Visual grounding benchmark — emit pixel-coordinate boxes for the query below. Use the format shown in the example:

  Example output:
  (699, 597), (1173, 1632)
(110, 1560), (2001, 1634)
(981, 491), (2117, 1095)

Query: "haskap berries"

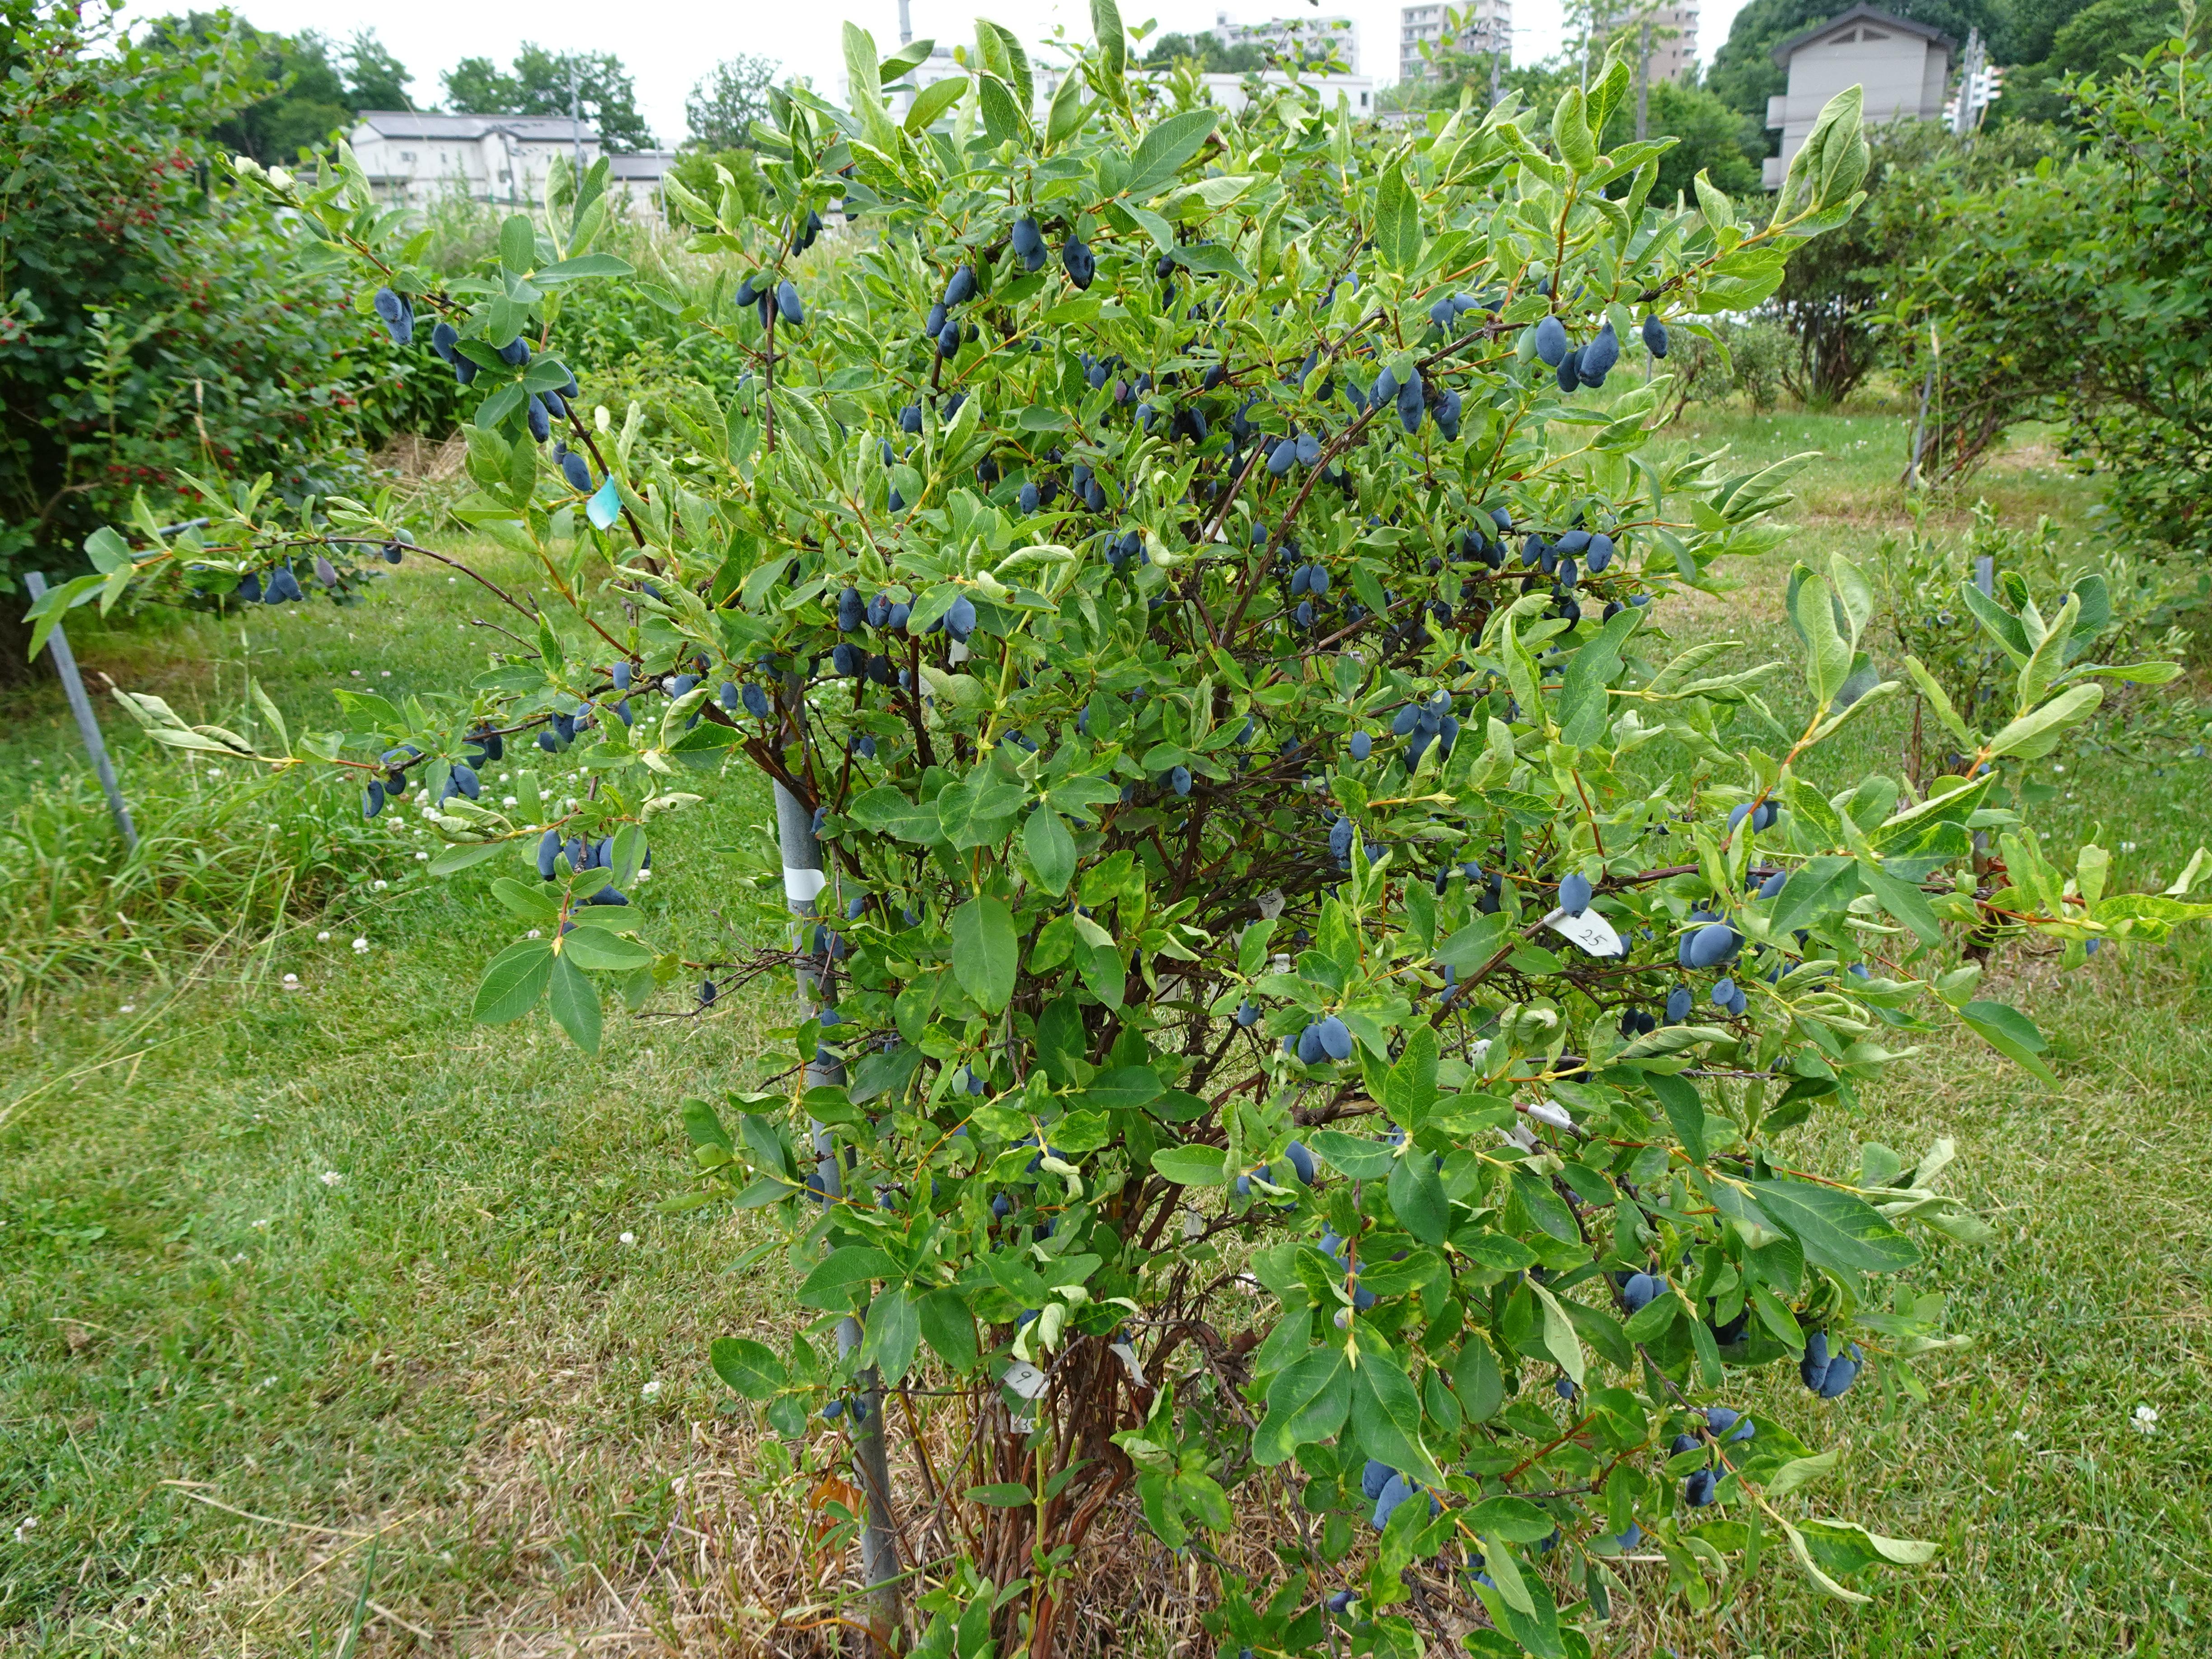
(992, 1192), (1009, 1223)
(1086, 526), (1098, 537)
(1429, 556), (1442, 570)
(1043, 451), (1050, 461)
(1172, 764), (1191, 799)
(1019, 736), (1039, 755)
(778, 281), (806, 325)
(1341, 595), (1352, 619)
(276, 567), (306, 605)
(1074, 478), (1087, 499)
(1335, 1255), (1350, 1288)
(1457, 659), (1467, 673)
(1727, 988), (1747, 1017)
(1436, 866), (1449, 895)
(1536, 858), (1552, 889)
(1488, 506), (1511, 529)
(1668, 988), (1693, 1021)
(1141, 586), (1166, 611)
(1620, 1007), (1640, 1036)
(1630, 595), (1648, 605)
(1049, 447), (1062, 465)
(1359, 344), (1367, 349)
(1692, 891), (1721, 913)
(1198, 237), (1219, 278)
(1793, 957), (1805, 969)
(876, 439), (893, 468)
(1488, 870), (1502, 892)
(1428, 716), (1457, 760)
(1848, 963), (1869, 978)
(1610, 515), (1622, 544)
(562, 450), (592, 490)
(1423, 599), (1433, 613)
(816, 1044), (832, 1066)
(1544, 670), (1552, 677)
(1453, 849), (1482, 881)
(264, 556), (293, 606)
(951, 1067), (968, 1095)
(1412, 453), (1424, 475)
(1136, 403), (1160, 437)
(1399, 620), (1414, 637)
(944, 606), (969, 644)
(1425, 482), (1433, 491)
(1429, 598), (1455, 629)
(924, 614), (945, 634)
(899, 904), (923, 929)
(1170, 409), (1189, 443)
(1187, 301), (1205, 324)
(1817, 1354), (1857, 1399)
(1028, 798), (1042, 811)
(1616, 1259), (1659, 1289)
(980, 450), (990, 465)
(1079, 705), (1096, 738)
(511, 335), (533, 365)
(1410, 1479), (1440, 1512)
(1363, 352), (1373, 359)
(1366, 513), (1379, 539)
(821, 1398), (845, 1422)
(1287, 541), (1301, 562)
(859, 736), (877, 759)
(1364, 1461), (1401, 1498)
(431, 322), (461, 363)
(1084, 355), (1107, 379)
(803, 642), (820, 680)
(1743, 863), (1756, 895)
(1448, 552), (1457, 562)
(1103, 364), (1112, 379)
(1385, 589), (1393, 606)
(1010, 1134), (1029, 1151)
(548, 359), (579, 399)
(798, 1175), (806, 1195)
(1350, 731), (1372, 763)
(1250, 522), (1268, 543)
(1972, 831), (1990, 852)
(801, 226), (817, 248)
(1755, 942), (1768, 958)
(1686, 922), (1740, 971)
(1533, 313), (1567, 366)
(694, 652), (711, 671)
(949, 393), (964, 420)
(1348, 605), (1363, 627)
(1410, 625), (1427, 645)
(559, 839), (580, 872)
(1757, 870), (1790, 900)
(1251, 920), (1258, 927)
(384, 542), (403, 565)
(1520, 577), (1538, 596)
(691, 663), (709, 680)
(434, 773), (460, 816)
(1571, 1071), (1594, 1083)
(1018, 1307), (1041, 1327)
(1281, 735), (1300, 761)
(1181, 342), (1189, 354)
(1029, 329), (1042, 353)
(1637, 1011), (1655, 1037)
(1012, 216), (1039, 259)
(1369, 381), (1388, 409)
(853, 1398), (869, 1423)
(1359, 605), (1366, 612)
(1251, 1164), (1271, 1185)
(1049, 1218), (1058, 1236)
(1353, 1262), (1377, 1311)
(1705, 1405), (1753, 1440)
(583, 844), (598, 872)
(1132, 686), (1145, 703)
(1114, 1325), (1130, 1347)
(1642, 312), (1669, 362)
(1062, 236), (1092, 287)
(1290, 850), (1299, 858)
(1541, 1535), (1553, 1553)
(1302, 928), (1310, 943)
(1278, 568), (1287, 574)
(1360, 843), (1378, 872)
(1427, 817), (1437, 823)
(1496, 541), (1508, 561)
(1023, 240), (1047, 272)
(899, 669), (912, 687)
(1327, 1588), (1355, 1612)
(1322, 782), (1330, 791)
(1559, 601), (1580, 632)
(879, 1192), (896, 1212)
(1237, 997), (1259, 1026)
(1292, 564), (1312, 594)
(914, 396), (934, 436)
(742, 681), (768, 719)
(755, 655), (766, 672)
(1556, 347), (1578, 394)
(1755, 860), (1766, 887)
(1222, 438), (1234, 457)
(1365, 341), (1377, 353)
(1539, 278), (1551, 295)
(792, 229), (804, 256)
(1652, 1275), (1671, 1296)
(2085, 938), (2100, 956)
(964, 273), (976, 302)
(1237, 756), (1249, 772)
(1681, 1252), (1694, 1266)
(1386, 625), (1400, 634)
(1554, 532), (1591, 552)
(1090, 362), (1106, 390)
(1453, 820), (1466, 829)
(965, 392), (986, 422)
(1377, 362), (1403, 401)
(1067, 901), (1090, 920)
(1625, 1273), (1654, 1313)
(314, 555), (337, 586)
(1574, 283), (1586, 298)
(1140, 373), (1152, 396)
(867, 589), (890, 629)
(885, 1043), (891, 1053)
(1333, 272), (1359, 302)
(1548, 585), (1570, 605)
(1334, 475), (1342, 488)
(1565, 1190), (1582, 1204)
(1767, 968), (1780, 983)
(1431, 298), (1453, 325)
(849, 732), (860, 753)
(1557, 1377), (1575, 1400)
(805, 1175), (826, 1201)
(501, 336), (521, 368)
(552, 708), (577, 743)
(1658, 815), (1679, 836)
(888, 483), (905, 513)
(1268, 436), (1295, 477)
(1116, 484), (1127, 514)
(1679, 929), (1703, 969)
(1520, 532), (1543, 568)
(1322, 1220), (1336, 1235)
(1393, 1133), (1405, 1145)
(1460, 586), (1471, 597)
(1094, 439), (1106, 449)
(1315, 1233), (1343, 1258)
(1320, 287), (1334, 309)
(966, 1060), (985, 1098)
(1297, 432), (1321, 467)
(1441, 388), (1463, 425)
(640, 846), (651, 870)
(1321, 464), (1334, 485)
(829, 932), (846, 959)
(1290, 372), (1299, 384)
(842, 194), (860, 221)
(1551, 1528), (1559, 1548)
(1086, 476), (1108, 510)
(1848, 1342), (1864, 1372)
(588, 885), (629, 908)
(1391, 702), (1419, 737)
(642, 581), (663, 601)
(1226, 426), (1240, 452)
(1314, 887), (1335, 906)
(1239, 1648), (1251, 1659)
(698, 979), (718, 1005)
(1402, 367), (1423, 397)
(1115, 380), (1126, 402)
(537, 830), (565, 881)
(1022, 1136), (1041, 1174)
(1112, 781), (1137, 807)
(1801, 1331), (1831, 1393)
(1098, 774), (1112, 781)
(1309, 563), (1329, 598)
(1193, 339), (1212, 349)
(1728, 801), (1767, 837)
(1528, 261), (1548, 282)
(1284, 1140), (1314, 1189)
(1503, 699), (1520, 725)
(1104, 529), (1123, 567)
(1297, 851), (1303, 857)
(236, 569), (261, 602)
(801, 921), (825, 957)
(1347, 416), (1353, 426)
(1669, 1432), (1704, 1458)
(1270, 1176), (1295, 1212)
(1214, 301), (1227, 314)
(765, 652), (783, 681)
(1109, 352), (1123, 374)
(1469, 275), (1486, 292)
(1667, 982), (1684, 1000)
(464, 732), (488, 769)
(1642, 929), (1654, 941)
(1071, 253), (1094, 290)
(1383, 637), (1394, 654)
(1376, 1475), (1415, 1534)
(539, 731), (559, 753)
(1177, 497), (1194, 527)
(1540, 543), (1557, 574)
(383, 766), (407, 796)
(1487, 1579), (1496, 1590)
(1204, 364), (1222, 391)
(923, 693), (933, 708)
(1234, 714), (1253, 743)
(940, 319), (960, 359)
(1685, 1468), (1718, 1508)
(903, 406), (921, 432)
(807, 209), (824, 231)
(1317, 428), (1327, 442)
(940, 264), (975, 303)
(1338, 859), (1351, 869)
(1711, 1305), (1749, 1350)
(759, 290), (779, 329)
(1160, 371), (1178, 388)
(1004, 730), (1021, 744)
(612, 661), (635, 691)
(1463, 532), (1483, 561)
(1079, 352), (1089, 369)
(1470, 631), (1482, 648)
(1587, 531), (1615, 573)
(1438, 322), (1454, 334)
(1292, 610), (1299, 621)
(1235, 403), (1249, 436)
(944, 404), (953, 422)
(543, 390), (570, 421)
(1204, 480), (1216, 499)
(388, 300), (414, 346)
(1005, 333), (1022, 348)
(1459, 706), (1474, 718)
(1397, 385), (1424, 435)
(1341, 380), (1366, 414)
(1388, 1125), (1403, 1146)
(1552, 1062), (1578, 1080)
(992, 462), (1009, 483)
(564, 922), (575, 935)
(1481, 286), (1505, 313)
(191, 564), (206, 598)
(1021, 483), (1041, 512)
(976, 470), (984, 482)
(528, 391), (548, 442)
(1552, 646), (1567, 675)
(950, 596), (976, 635)
(1249, 389), (1256, 397)
(375, 287), (403, 322)
(1298, 601), (1312, 625)
(1272, 304), (1280, 316)
(1129, 948), (1142, 977)
(1310, 611), (1319, 626)
(1165, 455), (1175, 464)
(1319, 599), (1337, 613)
(1120, 530), (1145, 557)
(1295, 620), (1310, 632)
(1321, 808), (1340, 826)
(1262, 431), (1278, 454)
(993, 1241), (1005, 1252)
(968, 746), (976, 756)
(912, 592), (919, 608)
(1777, 962), (1794, 976)
(1156, 770), (1173, 789)
(1454, 293), (1485, 318)
(478, 725), (504, 762)
(451, 352), (479, 386)
(1299, 1024), (1325, 1067)
(1038, 1115), (1050, 1128)
(1464, 1471), (1472, 1477)
(1302, 775), (1311, 780)
(1226, 452), (1243, 478)
(1613, 1522), (1643, 1551)
(980, 459), (994, 481)
(930, 1178), (940, 1197)
(1119, 383), (1131, 407)
(736, 273), (763, 308)
(1288, 411), (1299, 437)
(379, 744), (419, 766)
(1126, 379), (1141, 402)
(1443, 963), (1461, 990)
(1237, 1176), (1251, 1195)
(1558, 872), (1593, 918)
(1468, 1536), (1487, 1569)
(572, 699), (602, 733)
(395, 527), (415, 546)
(1432, 390), (1462, 441)
(1072, 464), (1093, 483)
(1474, 887), (1501, 914)
(1603, 602), (1623, 628)
(899, 406), (907, 424)
(1518, 1264), (1545, 1285)
(1478, 1571), (1490, 1600)
(1331, 817), (1351, 858)
(1247, 396), (1263, 430)
(1432, 688), (1452, 716)
(1572, 511), (1587, 531)
(1283, 1034), (1297, 1055)
(1662, 1011), (1677, 1027)
(952, 1124), (968, 1137)
(720, 681), (739, 710)
(1757, 800), (1781, 829)
(615, 697), (632, 728)
(1714, 1462), (1728, 1481)
(1048, 1145), (1067, 1162)
(1333, 1305), (1347, 1330)
(819, 1007), (842, 1028)
(833, 642), (852, 675)
(1644, 593), (1652, 614)
(1186, 407), (1207, 444)
(890, 1033), (899, 1048)
(1560, 557), (1579, 588)
(1300, 1012), (1324, 1034)
(866, 652), (896, 687)
(847, 897), (863, 921)
(1162, 284), (1175, 311)
(739, 372), (752, 390)
(361, 783), (385, 819)
(1099, 411), (1110, 428)
(1033, 1224), (1050, 1241)
(1321, 1016), (1352, 1059)
(1711, 976), (1734, 1005)
(927, 303), (948, 337)
(1575, 346), (1608, 387)
(1155, 256), (1177, 279)
(811, 806), (830, 837)
(835, 585), (864, 634)
(600, 834), (621, 868)
(1340, 466), (1360, 501)
(1272, 375), (1294, 405)
(1293, 929), (1305, 942)
(1331, 883), (1340, 901)
(1441, 983), (1469, 1011)
(1435, 1157), (1445, 1171)
(1718, 909), (1747, 962)
(970, 320), (980, 343)
(1141, 546), (1152, 566)
(1793, 928), (1810, 941)
(1316, 382), (1334, 402)
(1278, 547), (1291, 566)
(1483, 547), (1502, 570)
(1686, 907), (1720, 939)
(1515, 324), (1541, 366)
(1406, 725), (1434, 771)
(846, 642), (864, 679)
(1363, 242), (1372, 252)
(1487, 669), (1497, 678)
(1216, 320), (1224, 328)
(551, 440), (567, 465)
(1180, 820), (1188, 829)
(673, 674), (701, 730)
(783, 558), (801, 589)
(1421, 701), (1440, 734)
(1071, 814), (1086, 828)
(905, 446), (914, 458)
(1384, 513), (1399, 527)
(1298, 347), (1327, 390)
(1799, 934), (1814, 951)
(450, 764), (480, 801)
(1375, 844), (1389, 857)
(1579, 323), (1620, 379)
(1039, 482), (1057, 504)
(574, 897), (589, 916)
(1246, 919), (1254, 927)
(890, 601), (910, 642)
(1390, 1249), (1408, 1263)
(1607, 932), (1633, 960)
